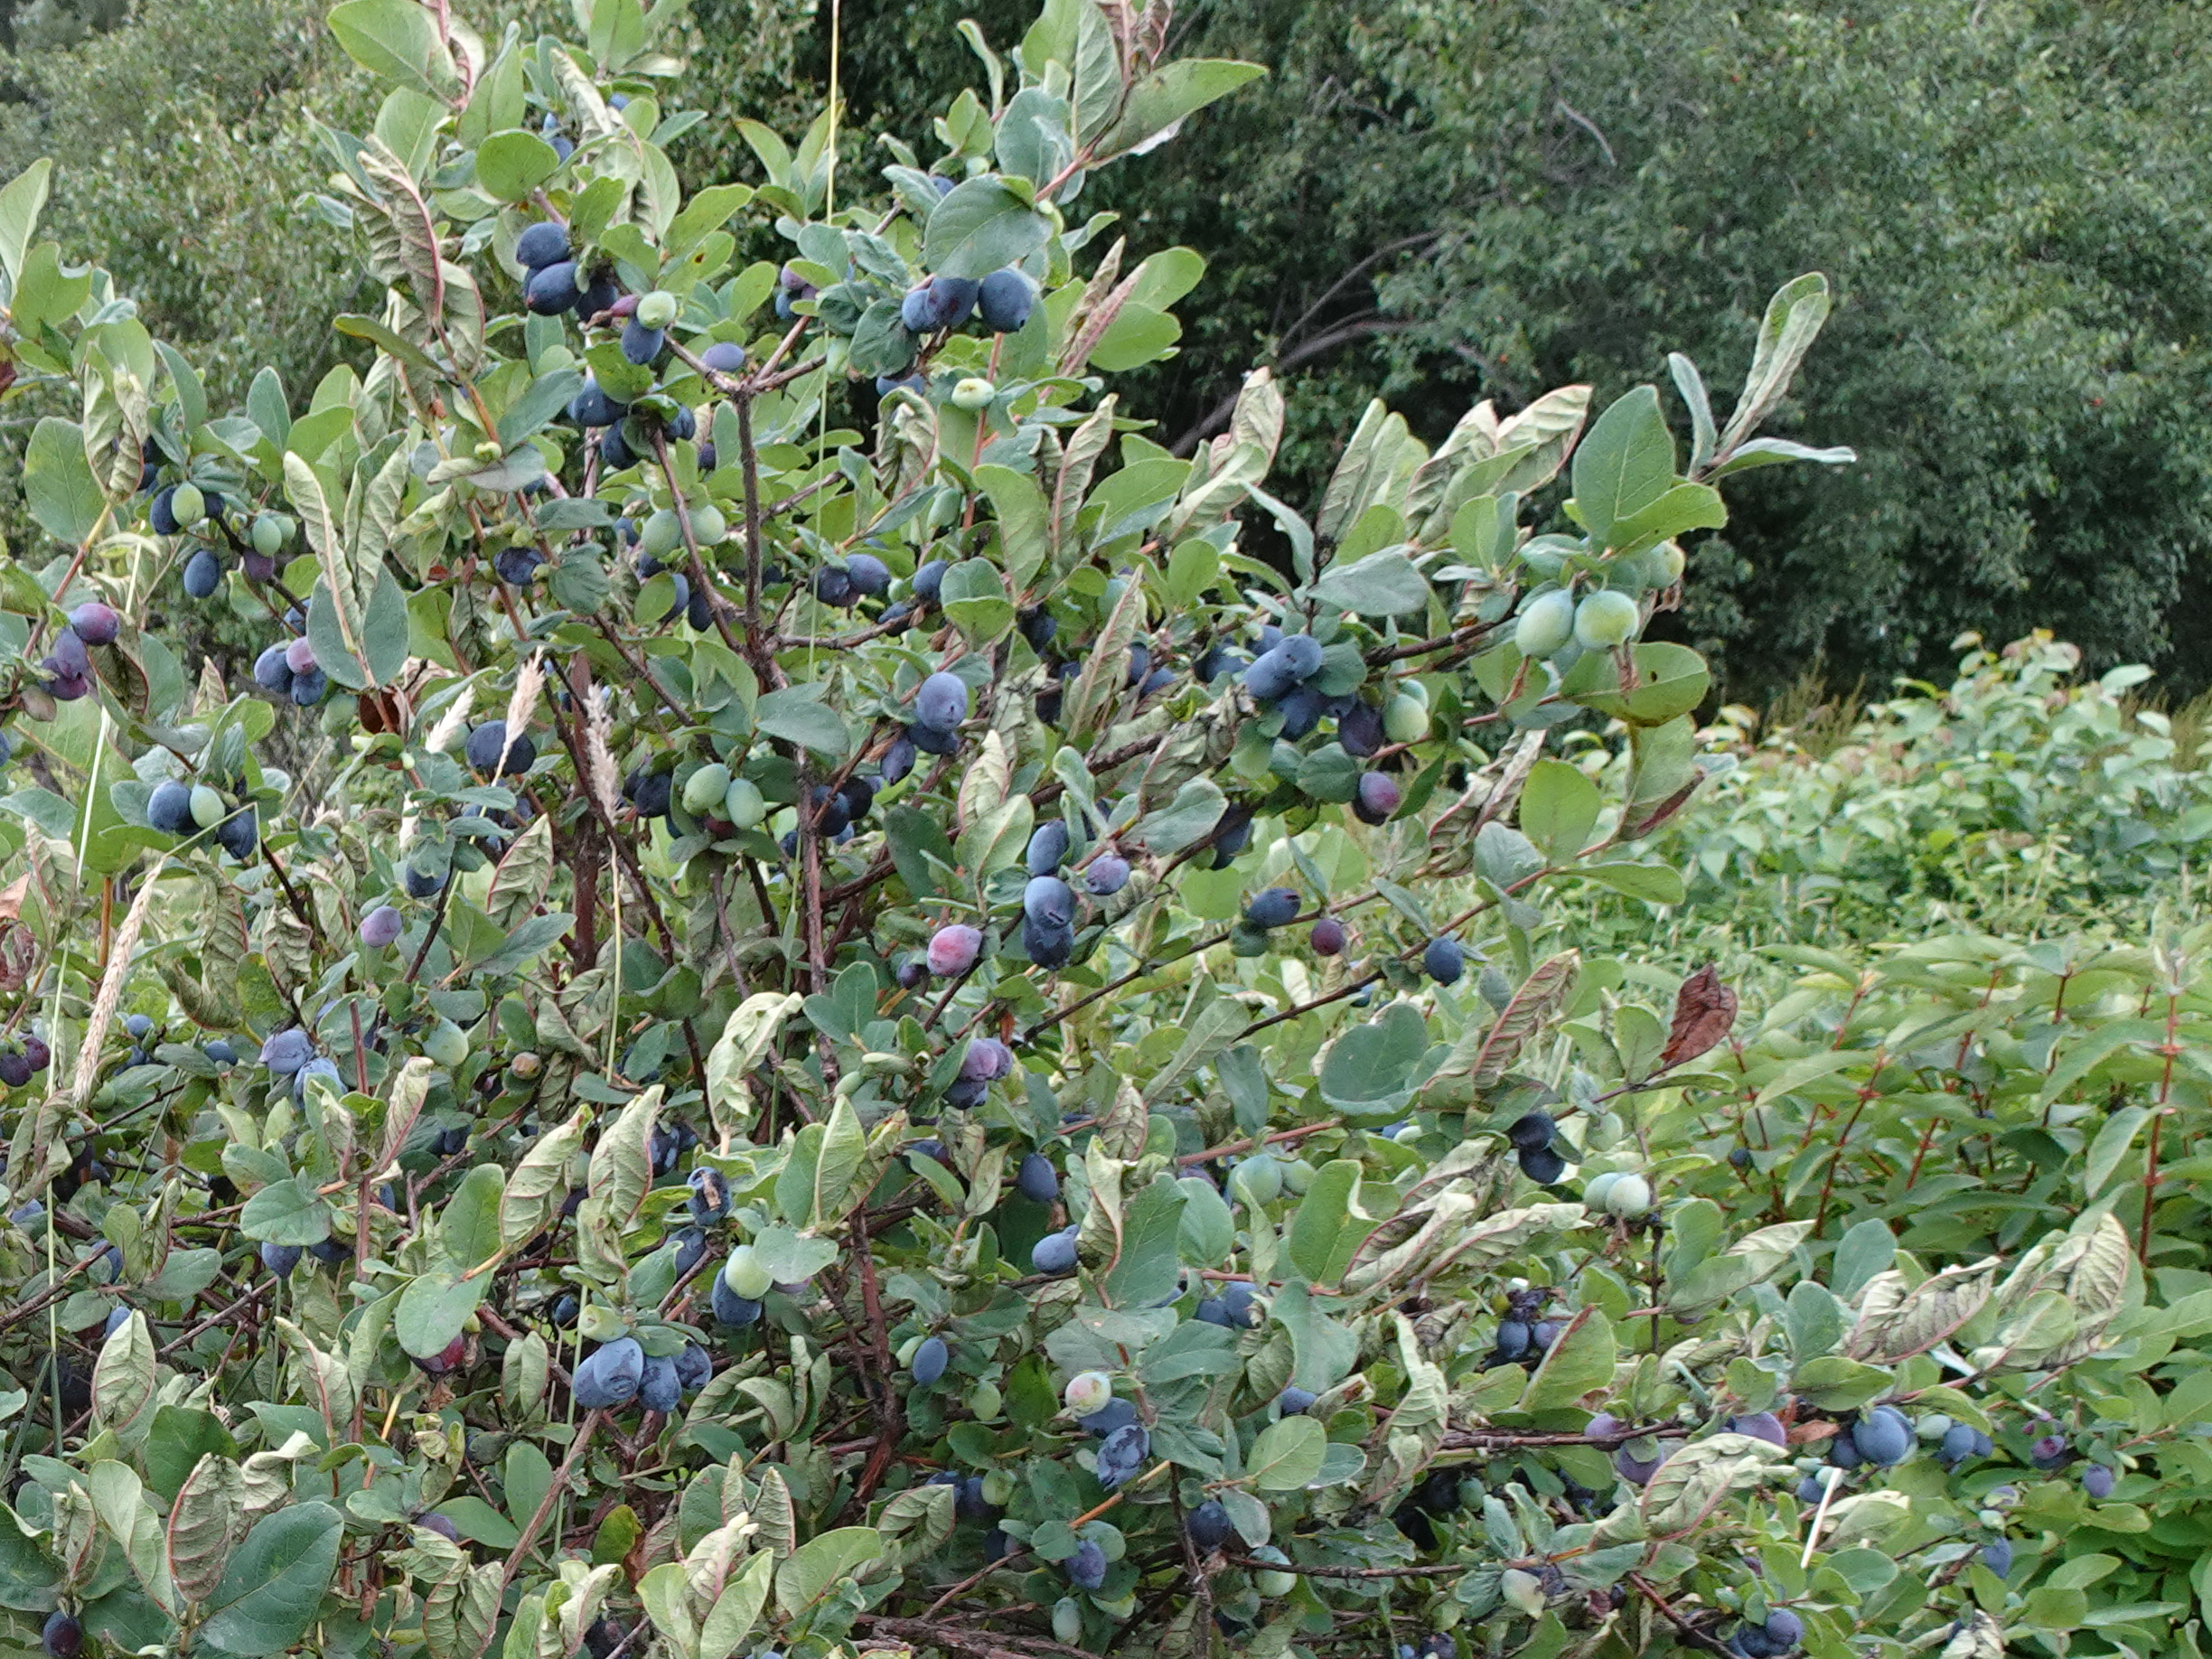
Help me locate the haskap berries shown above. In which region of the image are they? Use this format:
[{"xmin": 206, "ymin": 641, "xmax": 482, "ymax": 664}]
[
  {"xmin": 1060, "ymin": 662, "xmax": 1080, "ymax": 682},
  {"xmin": 573, "ymin": 1351, "xmax": 618, "ymax": 1409},
  {"xmin": 262, "ymin": 1028, "xmax": 314, "ymax": 1073},
  {"xmin": 700, "ymin": 441, "xmax": 715, "ymax": 470},
  {"xmin": 621, "ymin": 1047, "xmax": 633, "ymax": 1074},
  {"xmin": 1279, "ymin": 1386, "xmax": 1318, "ymax": 1420},
  {"xmin": 710, "ymin": 802, "xmax": 733, "ymax": 822},
  {"xmin": 289, "ymin": 666, "xmax": 329, "ymax": 706},
  {"xmin": 1247, "ymin": 886, "xmax": 1300, "ymax": 929},
  {"xmin": 830, "ymin": 591, "xmax": 859, "ymax": 607},
  {"xmin": 1605, "ymin": 1174, "xmax": 1649, "ymax": 1216},
  {"xmin": 137, "ymin": 462, "xmax": 157, "ymax": 492},
  {"xmin": 927, "ymin": 1471, "xmax": 964, "ymax": 1503},
  {"xmin": 466, "ymin": 1314, "xmax": 481, "ymax": 1334},
  {"xmin": 63, "ymin": 1145, "xmax": 91, "ymax": 1172},
  {"xmin": 143, "ymin": 482, "xmax": 159, "ymax": 500},
  {"xmin": 1585, "ymin": 1112, "xmax": 1623, "ymax": 1152},
  {"xmin": 1194, "ymin": 642, "xmax": 1244, "ymax": 683},
  {"xmin": 209, "ymin": 1193, "xmax": 217, "ymax": 1210},
  {"xmin": 1118, "ymin": 566, "xmax": 1135, "ymax": 577},
  {"xmin": 1079, "ymin": 1398, "xmax": 1137, "ymax": 1433},
  {"xmin": 593, "ymin": 1337, "xmax": 645, "ymax": 1398},
  {"xmin": 1351, "ymin": 791, "xmax": 1385, "ymax": 827},
  {"xmin": 1553, "ymin": 1464, "xmax": 1595, "ymax": 1498},
  {"xmin": 1681, "ymin": 1625, "xmax": 1716, "ymax": 1649},
  {"xmin": 326, "ymin": 689, "xmax": 357, "ymax": 733},
  {"xmin": 1142, "ymin": 669, "xmax": 1176, "ymax": 698},
  {"xmin": 63, "ymin": 1121, "xmax": 86, "ymax": 1157},
  {"xmin": 532, "ymin": 565, "xmax": 551, "ymax": 580},
  {"xmin": 894, "ymin": 955, "xmax": 920, "ymax": 987},
  {"xmin": 577, "ymin": 1305, "xmax": 630, "ymax": 1344},
  {"xmin": 1618, "ymin": 1438, "xmax": 1666, "ymax": 1485},
  {"xmin": 475, "ymin": 440, "xmax": 501, "ymax": 462},
  {"xmin": 1191, "ymin": 845, "xmax": 1217, "ymax": 871},
  {"xmin": 1052, "ymin": 1596, "xmax": 1084, "ymax": 1646},
  {"xmin": 88, "ymin": 1161, "xmax": 111, "ymax": 1187},
  {"xmin": 293, "ymin": 1057, "xmax": 344, "ymax": 1110},
  {"xmin": 950, "ymin": 379, "xmax": 996, "ymax": 411},
  {"xmin": 576, "ymin": 270, "xmax": 617, "ymax": 328},
  {"xmin": 7, "ymin": 1036, "xmax": 52, "ymax": 1070},
  {"xmin": 207, "ymin": 1174, "xmax": 234, "ymax": 1200},
  {"xmin": 1853, "ymin": 1411, "xmax": 1907, "ymax": 1466},
  {"xmin": 1021, "ymin": 913, "xmax": 1074, "ymax": 969},
  {"xmin": 958, "ymin": 1478, "xmax": 1007, "ymax": 1522},
  {"xmin": 702, "ymin": 342, "xmax": 744, "ymax": 372},
  {"xmin": 901, "ymin": 1140, "xmax": 950, "ymax": 1174},
  {"xmin": 1029, "ymin": 1221, "xmax": 1090, "ymax": 1275},
  {"xmin": 1005, "ymin": 1533, "xmax": 1038, "ymax": 1573},
  {"xmin": 876, "ymin": 372, "xmax": 926, "ymax": 399},
  {"xmin": 928, "ymin": 924, "xmax": 981, "ymax": 976},
  {"xmin": 202, "ymin": 492, "xmax": 224, "ymax": 517},
  {"xmin": 1874, "ymin": 1407, "xmax": 1912, "ymax": 1444},
  {"xmin": 1396, "ymin": 1645, "xmax": 1422, "ymax": 1659},
  {"xmin": 1059, "ymin": 1533, "xmax": 1102, "ymax": 1586},
  {"xmin": 838, "ymin": 776, "xmax": 874, "ymax": 822},
  {"xmin": 1798, "ymin": 1474, "xmax": 1823, "ymax": 1502},
  {"xmin": 361, "ymin": 906, "xmax": 402, "ymax": 949},
  {"xmin": 517, "ymin": 222, "xmax": 567, "ymax": 271},
  {"xmin": 11, "ymin": 1198, "xmax": 43, "ymax": 1224},
  {"xmin": 464, "ymin": 860, "xmax": 498, "ymax": 902},
  {"xmin": 363, "ymin": 1025, "xmax": 390, "ymax": 1057},
  {"xmin": 38, "ymin": 659, "xmax": 87, "ymax": 703},
  {"xmin": 1455, "ymin": 1477, "xmax": 1486, "ymax": 1511},
  {"xmin": 340, "ymin": 1082, "xmax": 349, "ymax": 1094},
  {"xmin": 475, "ymin": 1072, "xmax": 488, "ymax": 1091},
  {"xmin": 512, "ymin": 524, "xmax": 534, "ymax": 546},
  {"xmin": 647, "ymin": 1070, "xmax": 662, "ymax": 1082},
  {"xmin": 2020, "ymin": 1419, "xmax": 2066, "ymax": 1460},
  {"xmin": 1828, "ymin": 1425, "xmax": 1862, "ymax": 1471},
  {"xmin": 807, "ymin": 786, "xmax": 850, "ymax": 837},
  {"xmin": 981, "ymin": 1038, "xmax": 1013, "ymax": 1080},
  {"xmin": 547, "ymin": 136, "xmax": 573, "ymax": 164},
  {"xmin": 918, "ymin": 672, "xmax": 967, "ymax": 734},
  {"xmin": 663, "ymin": 1227, "xmax": 706, "ymax": 1274},
  {"xmin": 1963, "ymin": 1423, "xmax": 1993, "ymax": 1458},
  {"xmin": 544, "ymin": 112, "xmax": 558, "ymax": 132},
  {"xmin": 520, "ymin": 1124, "xmax": 529, "ymax": 1138},
  {"xmin": 688, "ymin": 592, "xmax": 714, "ymax": 632},
  {"xmin": 1381, "ymin": 1119, "xmax": 1409, "ymax": 1138},
  {"xmin": 1247, "ymin": 1546, "xmax": 1297, "ymax": 1596},
  {"xmin": 775, "ymin": 290, "xmax": 799, "ymax": 319},
  {"xmin": 664, "ymin": 811, "xmax": 684, "ymax": 838},
  {"xmin": 802, "ymin": 284, "xmax": 816, "ymax": 301},
  {"xmin": 1096, "ymin": 1448, "xmax": 1137, "ymax": 1487},
  {"xmin": 184, "ymin": 550, "xmax": 219, "ymax": 596},
  {"xmin": 1385, "ymin": 679, "xmax": 1433, "ymax": 710},
  {"xmin": 1795, "ymin": 1457, "xmax": 1822, "ymax": 1472},
  {"xmin": 1583, "ymin": 1412, "xmax": 1626, "ymax": 1451},
  {"xmin": 307, "ymin": 1236, "xmax": 354, "ymax": 1262},
  {"xmin": 268, "ymin": 674, "xmax": 293, "ymax": 695},
  {"xmin": 1534, "ymin": 1322, "xmax": 1561, "ymax": 1351},
  {"xmin": 489, "ymin": 1075, "xmax": 502, "ymax": 1103},
  {"xmin": 1581, "ymin": 1172, "xmax": 1622, "ymax": 1212},
  {"xmin": 222, "ymin": 808, "xmax": 256, "ymax": 860},
  {"xmin": 1501, "ymin": 1568, "xmax": 1546, "ymax": 1618},
  {"xmin": 635, "ymin": 1345, "xmax": 684, "ymax": 1412},
  {"xmin": 1220, "ymin": 1589, "xmax": 1262, "ymax": 1624},
  {"xmin": 640, "ymin": 550, "xmax": 665, "ymax": 578},
  {"xmin": 523, "ymin": 474, "xmax": 547, "ymax": 495},
  {"xmin": 781, "ymin": 257, "xmax": 806, "ymax": 289},
  {"xmin": 1360, "ymin": 770, "xmax": 1399, "ymax": 816},
  {"xmin": 1571, "ymin": 1497, "xmax": 1602, "ymax": 1517},
  {"xmin": 429, "ymin": 1129, "xmax": 446, "ymax": 1157},
  {"xmin": 600, "ymin": 417, "xmax": 645, "ymax": 469},
  {"xmin": 465, "ymin": 720, "xmax": 511, "ymax": 767},
  {"xmin": 1309, "ymin": 917, "xmax": 1347, "ymax": 956},
  {"xmin": 1914, "ymin": 1414, "xmax": 1951, "ymax": 1438},
  {"xmin": 115, "ymin": 1045, "xmax": 145, "ymax": 1076},
  {"xmin": 146, "ymin": 780, "xmax": 190, "ymax": 831},
  {"xmin": 1765, "ymin": 1607, "xmax": 1801, "ymax": 1643},
  {"xmin": 1335, "ymin": 703, "xmax": 1382, "ymax": 757},
  {"xmin": 905, "ymin": 720, "xmax": 957, "ymax": 755},
  {"xmin": 261, "ymin": 1240, "xmax": 303, "ymax": 1278},
  {"xmin": 404, "ymin": 849, "xmax": 450, "ymax": 898},
  {"xmin": 980, "ymin": 1466, "xmax": 1018, "ymax": 1504},
  {"xmin": 0, "ymin": 1141, "xmax": 14, "ymax": 1179},
  {"xmin": 635, "ymin": 771, "xmax": 673, "ymax": 816},
  {"xmin": 1228, "ymin": 921, "xmax": 1269, "ymax": 957},
  {"xmin": 1515, "ymin": 590, "xmax": 1572, "ymax": 661},
  {"xmin": 560, "ymin": 1189, "xmax": 589, "ymax": 1213},
  {"xmin": 684, "ymin": 1166, "xmax": 728, "ymax": 1227},
  {"xmin": 1497, "ymin": 1321, "xmax": 1529, "ymax": 1357},
  {"xmin": 1504, "ymin": 1112, "xmax": 1555, "ymax": 1153},
  {"xmin": 1984, "ymin": 1484, "xmax": 2018, "ymax": 1508},
  {"xmin": 1148, "ymin": 1286, "xmax": 1181, "ymax": 1308},
  {"xmin": 1087, "ymin": 852, "xmax": 1130, "ymax": 894},
  {"xmin": 970, "ymin": 1378, "xmax": 1002, "ymax": 1421},
  {"xmin": 982, "ymin": 1527, "xmax": 1009, "ymax": 1569},
  {"xmin": 1609, "ymin": 1583, "xmax": 1626, "ymax": 1609},
  {"xmin": 684, "ymin": 763, "xmax": 728, "ymax": 809},
  {"xmin": 637, "ymin": 291, "xmax": 677, "ymax": 328},
  {"xmin": 1517, "ymin": 1147, "xmax": 1566, "ymax": 1185},
  {"xmin": 43, "ymin": 1610, "xmax": 84, "ymax": 1659},
  {"xmin": 282, "ymin": 598, "xmax": 313, "ymax": 638},
  {"xmin": 962, "ymin": 1040, "xmax": 995, "ymax": 1080},
  {"xmin": 316, "ymin": 1000, "xmax": 340, "ymax": 1028},
  {"xmin": 1574, "ymin": 591, "xmax": 1639, "ymax": 649},
  {"xmin": 781, "ymin": 831, "xmax": 803, "ymax": 858},
  {"xmin": 941, "ymin": 1072, "xmax": 986, "ymax": 1112},
  {"xmin": 136, "ymin": 1644, "xmax": 169, "ymax": 1659},
  {"xmin": 726, "ymin": 778, "xmax": 767, "ymax": 829},
  {"xmin": 1079, "ymin": 1519, "xmax": 1126, "ymax": 1563},
  {"xmin": 1348, "ymin": 982, "xmax": 1374, "ymax": 1007},
  {"xmin": 279, "ymin": 516, "xmax": 296, "ymax": 540},
  {"xmin": 409, "ymin": 1514, "xmax": 457, "ymax": 1549},
  {"xmin": 1381, "ymin": 693, "xmax": 1430, "ymax": 745},
  {"xmin": 256, "ymin": 638, "xmax": 293, "ymax": 685},
  {"xmin": 485, "ymin": 833, "xmax": 499, "ymax": 850},
  {"xmin": 1079, "ymin": 798, "xmax": 1112, "ymax": 840},
  {"xmin": 903, "ymin": 290, "xmax": 932, "ymax": 334},
  {"xmin": 1178, "ymin": 1166, "xmax": 1219, "ymax": 1193},
  {"xmin": 378, "ymin": 1180, "xmax": 395, "ymax": 1214},
  {"xmin": 1511, "ymin": 1467, "xmax": 1538, "ymax": 1498},
  {"xmin": 503, "ymin": 795, "xmax": 531, "ymax": 825},
  {"xmin": 609, "ymin": 95, "xmax": 631, "ymax": 112},
  {"xmin": 1815, "ymin": 1466, "xmax": 1845, "ymax": 1490},
  {"xmin": 319, "ymin": 710, "xmax": 334, "ymax": 735},
  {"xmin": 660, "ymin": 574, "xmax": 690, "ymax": 621},
  {"xmin": 827, "ymin": 338, "xmax": 851, "ymax": 377},
  {"xmin": 1272, "ymin": 633, "xmax": 1327, "ymax": 677},
  {"xmin": 879, "ymin": 736, "xmax": 915, "ymax": 786},
  {"xmin": 417, "ymin": 1330, "xmax": 469, "ymax": 1375},
  {"xmin": 1090, "ymin": 1593, "xmax": 1137, "ymax": 1620},
  {"xmin": 1430, "ymin": 1470, "xmax": 1462, "ymax": 1510},
  {"xmin": 0, "ymin": 1051, "xmax": 33, "ymax": 1087},
  {"xmin": 445, "ymin": 1124, "xmax": 472, "ymax": 1153},
  {"xmin": 34, "ymin": 1354, "xmax": 93, "ymax": 1408},
  {"xmin": 1121, "ymin": 642, "xmax": 1151, "ymax": 692},
  {"xmin": 1733, "ymin": 1410, "xmax": 1784, "ymax": 1449},
  {"xmin": 712, "ymin": 1266, "xmax": 764, "ymax": 1329},
  {"xmin": 664, "ymin": 405, "xmax": 696, "ymax": 445},
  {"xmin": 1280, "ymin": 1156, "xmax": 1317, "ymax": 1196},
  {"xmin": 723, "ymin": 1243, "xmax": 772, "ymax": 1299},
  {"xmin": 1393, "ymin": 1125, "xmax": 1423, "ymax": 1143},
  {"xmin": 1228, "ymin": 1151, "xmax": 1281, "ymax": 1208},
  {"xmin": 1244, "ymin": 641, "xmax": 1294, "ymax": 700},
  {"xmin": 2083, "ymin": 1464, "xmax": 2111, "ymax": 1496},
  {"xmin": 602, "ymin": 686, "xmax": 611, "ymax": 700},
  {"xmin": 844, "ymin": 554, "xmax": 892, "ymax": 594},
  {"xmin": 1275, "ymin": 686, "xmax": 1325, "ymax": 743},
  {"xmin": 1062, "ymin": 1113, "xmax": 1087, "ymax": 1124},
  {"xmin": 685, "ymin": 507, "xmax": 726, "ymax": 545},
  {"xmin": 525, "ymin": 267, "xmax": 541, "ymax": 295},
  {"xmin": 585, "ymin": 1618, "xmax": 630, "ymax": 1659},
  {"xmin": 729, "ymin": 559, "xmax": 782, "ymax": 587},
  {"xmin": 173, "ymin": 480, "xmax": 204, "ymax": 527},
  {"xmin": 1423, "ymin": 937, "xmax": 1462, "ymax": 985},
  {"xmin": 244, "ymin": 547, "xmax": 275, "ymax": 581},
  {"xmin": 566, "ymin": 381, "xmax": 627, "ymax": 428},
  {"xmin": 544, "ymin": 660, "xmax": 555, "ymax": 675},
  {"xmin": 1320, "ymin": 690, "xmax": 1359, "ymax": 718},
  {"xmin": 284, "ymin": 634, "xmax": 320, "ymax": 677},
  {"xmin": 1744, "ymin": 1557, "xmax": 1760, "ymax": 1571},
  {"xmin": 931, "ymin": 178, "xmax": 955, "ymax": 199},
  {"xmin": 1208, "ymin": 804, "xmax": 1252, "ymax": 873},
  {"xmin": 1016, "ymin": 604, "xmax": 1055, "ymax": 654},
  {"xmin": 1024, "ymin": 820, "xmax": 1070, "ymax": 876},
  {"xmin": 1035, "ymin": 690, "xmax": 1065, "ymax": 724},
  {"xmin": 527, "ymin": 261, "xmax": 590, "ymax": 316},
  {"xmin": 895, "ymin": 1334, "xmax": 923, "ymax": 1368},
  {"xmin": 1101, "ymin": 1425, "xmax": 1150, "ymax": 1466},
  {"xmin": 772, "ymin": 1277, "xmax": 812, "ymax": 1295},
  {"xmin": 911, "ymin": 1339, "xmax": 948, "ymax": 1385},
  {"xmin": 1943, "ymin": 1420, "xmax": 1974, "ymax": 1463},
  {"xmin": 1395, "ymin": 1508, "xmax": 1440, "ymax": 1550},
  {"xmin": 557, "ymin": 690, "xmax": 572, "ymax": 712},
  {"xmin": 105, "ymin": 1306, "xmax": 133, "ymax": 1341},
  {"xmin": 511, "ymin": 1051, "xmax": 542, "ymax": 1079},
  {"xmin": 90, "ymin": 1079, "xmax": 116, "ymax": 1115},
  {"xmin": 2029, "ymin": 1452, "xmax": 2070, "ymax": 1471},
  {"xmin": 1223, "ymin": 1282, "xmax": 1266, "ymax": 1329},
  {"xmin": 672, "ymin": 1342, "xmax": 716, "ymax": 1400},
  {"xmin": 1017, "ymin": 1152, "xmax": 1058, "ymax": 1203},
  {"xmin": 616, "ymin": 1065, "xmax": 621, "ymax": 1075},
  {"xmin": 126, "ymin": 1014, "xmax": 166, "ymax": 1039},
  {"xmin": 832, "ymin": 823, "xmax": 854, "ymax": 845},
  {"xmin": 204, "ymin": 1040, "xmax": 237, "ymax": 1066},
  {"xmin": 1246, "ymin": 626, "xmax": 1283, "ymax": 657},
  {"xmin": 878, "ymin": 599, "xmax": 932, "ymax": 637},
  {"xmin": 974, "ymin": 1086, "xmax": 989, "ymax": 1107},
  {"xmin": 643, "ymin": 1121, "xmax": 680, "ymax": 1178},
  {"xmin": 253, "ymin": 518, "xmax": 281, "ymax": 556},
  {"xmin": 563, "ymin": 1150, "xmax": 593, "ymax": 1189},
  {"xmin": 461, "ymin": 802, "xmax": 505, "ymax": 829},
  {"xmin": 1419, "ymin": 1631, "xmax": 1455, "ymax": 1659},
  {"xmin": 1644, "ymin": 542, "xmax": 1686, "ymax": 588},
  {"xmin": 68, "ymin": 603, "xmax": 119, "ymax": 647},
  {"xmin": 141, "ymin": 435, "xmax": 164, "ymax": 465},
  {"xmin": 613, "ymin": 514, "xmax": 641, "ymax": 547},
  {"xmin": 912, "ymin": 560, "xmax": 949, "ymax": 599},
  {"xmin": 1716, "ymin": 1631, "xmax": 1749, "ymax": 1659},
  {"xmin": 358, "ymin": 888, "xmax": 393, "ymax": 917},
  {"xmin": 152, "ymin": 485, "xmax": 180, "ymax": 535},
  {"xmin": 1196, "ymin": 1298, "xmax": 1233, "ymax": 1333},
  {"xmin": 926, "ymin": 276, "xmax": 978, "ymax": 326},
  {"xmin": 622, "ymin": 316, "xmax": 665, "ymax": 363},
  {"xmin": 865, "ymin": 538, "xmax": 886, "ymax": 550},
  {"xmin": 863, "ymin": 774, "xmax": 883, "ymax": 794},
  {"xmin": 492, "ymin": 548, "xmax": 546, "ymax": 586},
  {"xmin": 91, "ymin": 1240, "xmax": 122, "ymax": 1282},
  {"xmin": 1524, "ymin": 1564, "xmax": 1562, "ymax": 1595},
  {"xmin": 1981, "ymin": 1536, "xmax": 2012, "ymax": 1579},
  {"xmin": 53, "ymin": 634, "xmax": 91, "ymax": 681},
  {"xmin": 1020, "ymin": 875, "xmax": 1075, "ymax": 926},
  {"xmin": 622, "ymin": 769, "xmax": 644, "ymax": 802},
  {"xmin": 641, "ymin": 509, "xmax": 683, "ymax": 557},
  {"xmin": 1721, "ymin": 1427, "xmax": 1732, "ymax": 1434},
  {"xmin": 21, "ymin": 683, "xmax": 56, "ymax": 724},
  {"xmin": 420, "ymin": 1018, "xmax": 467, "ymax": 1067},
  {"xmin": 190, "ymin": 783, "xmax": 226, "ymax": 832},
  {"xmin": 1948, "ymin": 1619, "xmax": 1965, "ymax": 1640},
  {"xmin": 52, "ymin": 1172, "xmax": 82, "ymax": 1205},
  {"xmin": 555, "ymin": 1292, "xmax": 586, "ymax": 1330},
  {"xmin": 832, "ymin": 1072, "xmax": 863, "ymax": 1099},
  {"xmin": 909, "ymin": 1115, "xmax": 938, "ymax": 1126},
  {"xmin": 524, "ymin": 1229, "xmax": 549, "ymax": 1259},
  {"xmin": 1978, "ymin": 1509, "xmax": 2006, "ymax": 1531},
  {"xmin": 1737, "ymin": 1619, "xmax": 1786, "ymax": 1657},
  {"xmin": 503, "ymin": 732, "xmax": 536, "ymax": 773},
  {"xmin": 979, "ymin": 268, "xmax": 1036, "ymax": 331},
  {"xmin": 1063, "ymin": 1368, "xmax": 1110, "ymax": 1418},
  {"xmin": 525, "ymin": 1107, "xmax": 537, "ymax": 1138},
  {"xmin": 465, "ymin": 1433, "xmax": 475, "ymax": 1460},
  {"xmin": 673, "ymin": 1122, "xmax": 697, "ymax": 1153},
  {"xmin": 402, "ymin": 1024, "xmax": 420, "ymax": 1035},
  {"xmin": 811, "ymin": 564, "xmax": 850, "ymax": 604},
  {"xmin": 1223, "ymin": 635, "xmax": 1238, "ymax": 646}
]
